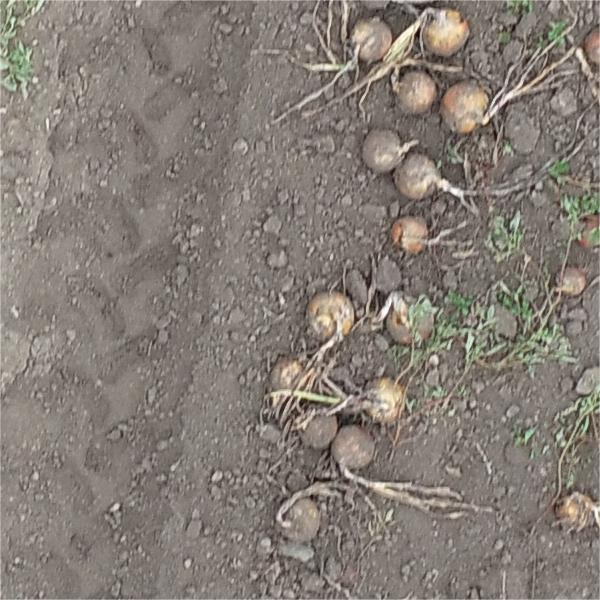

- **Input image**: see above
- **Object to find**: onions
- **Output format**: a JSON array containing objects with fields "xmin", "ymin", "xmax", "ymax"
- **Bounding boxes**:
[
  {"xmin": 423, "ymin": 8, "xmax": 467, "ymax": 52},
  {"xmin": 394, "ymin": 68, "xmax": 437, "ymax": 114},
  {"xmin": 359, "ymin": 377, "xmax": 405, "ymax": 420},
  {"xmin": 391, "ymin": 213, "xmax": 427, "ymax": 251},
  {"xmin": 555, "ymin": 266, "xmax": 584, "ymax": 297},
  {"xmin": 384, "ymin": 295, "xmax": 436, "ymax": 344},
  {"xmin": 556, "ymin": 491, "xmax": 591, "ymax": 527},
  {"xmin": 577, "ymin": 31, "xmax": 599, "ymax": 64},
  {"xmin": 362, "ymin": 128, "xmax": 403, "ymax": 172},
  {"xmin": 331, "ymin": 427, "xmax": 375, "ymax": 470},
  {"xmin": 269, "ymin": 355, "xmax": 313, "ymax": 396},
  {"xmin": 349, "ymin": 20, "xmax": 390, "ymax": 62},
  {"xmin": 306, "ymin": 292, "xmax": 354, "ymax": 343},
  {"xmin": 394, "ymin": 151, "xmax": 438, "ymax": 197},
  {"xmin": 277, "ymin": 496, "xmax": 321, "ymax": 541},
  {"xmin": 440, "ymin": 82, "xmax": 488, "ymax": 131},
  {"xmin": 577, "ymin": 220, "xmax": 600, "ymax": 246},
  {"xmin": 301, "ymin": 410, "xmax": 338, "ymax": 447}
]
